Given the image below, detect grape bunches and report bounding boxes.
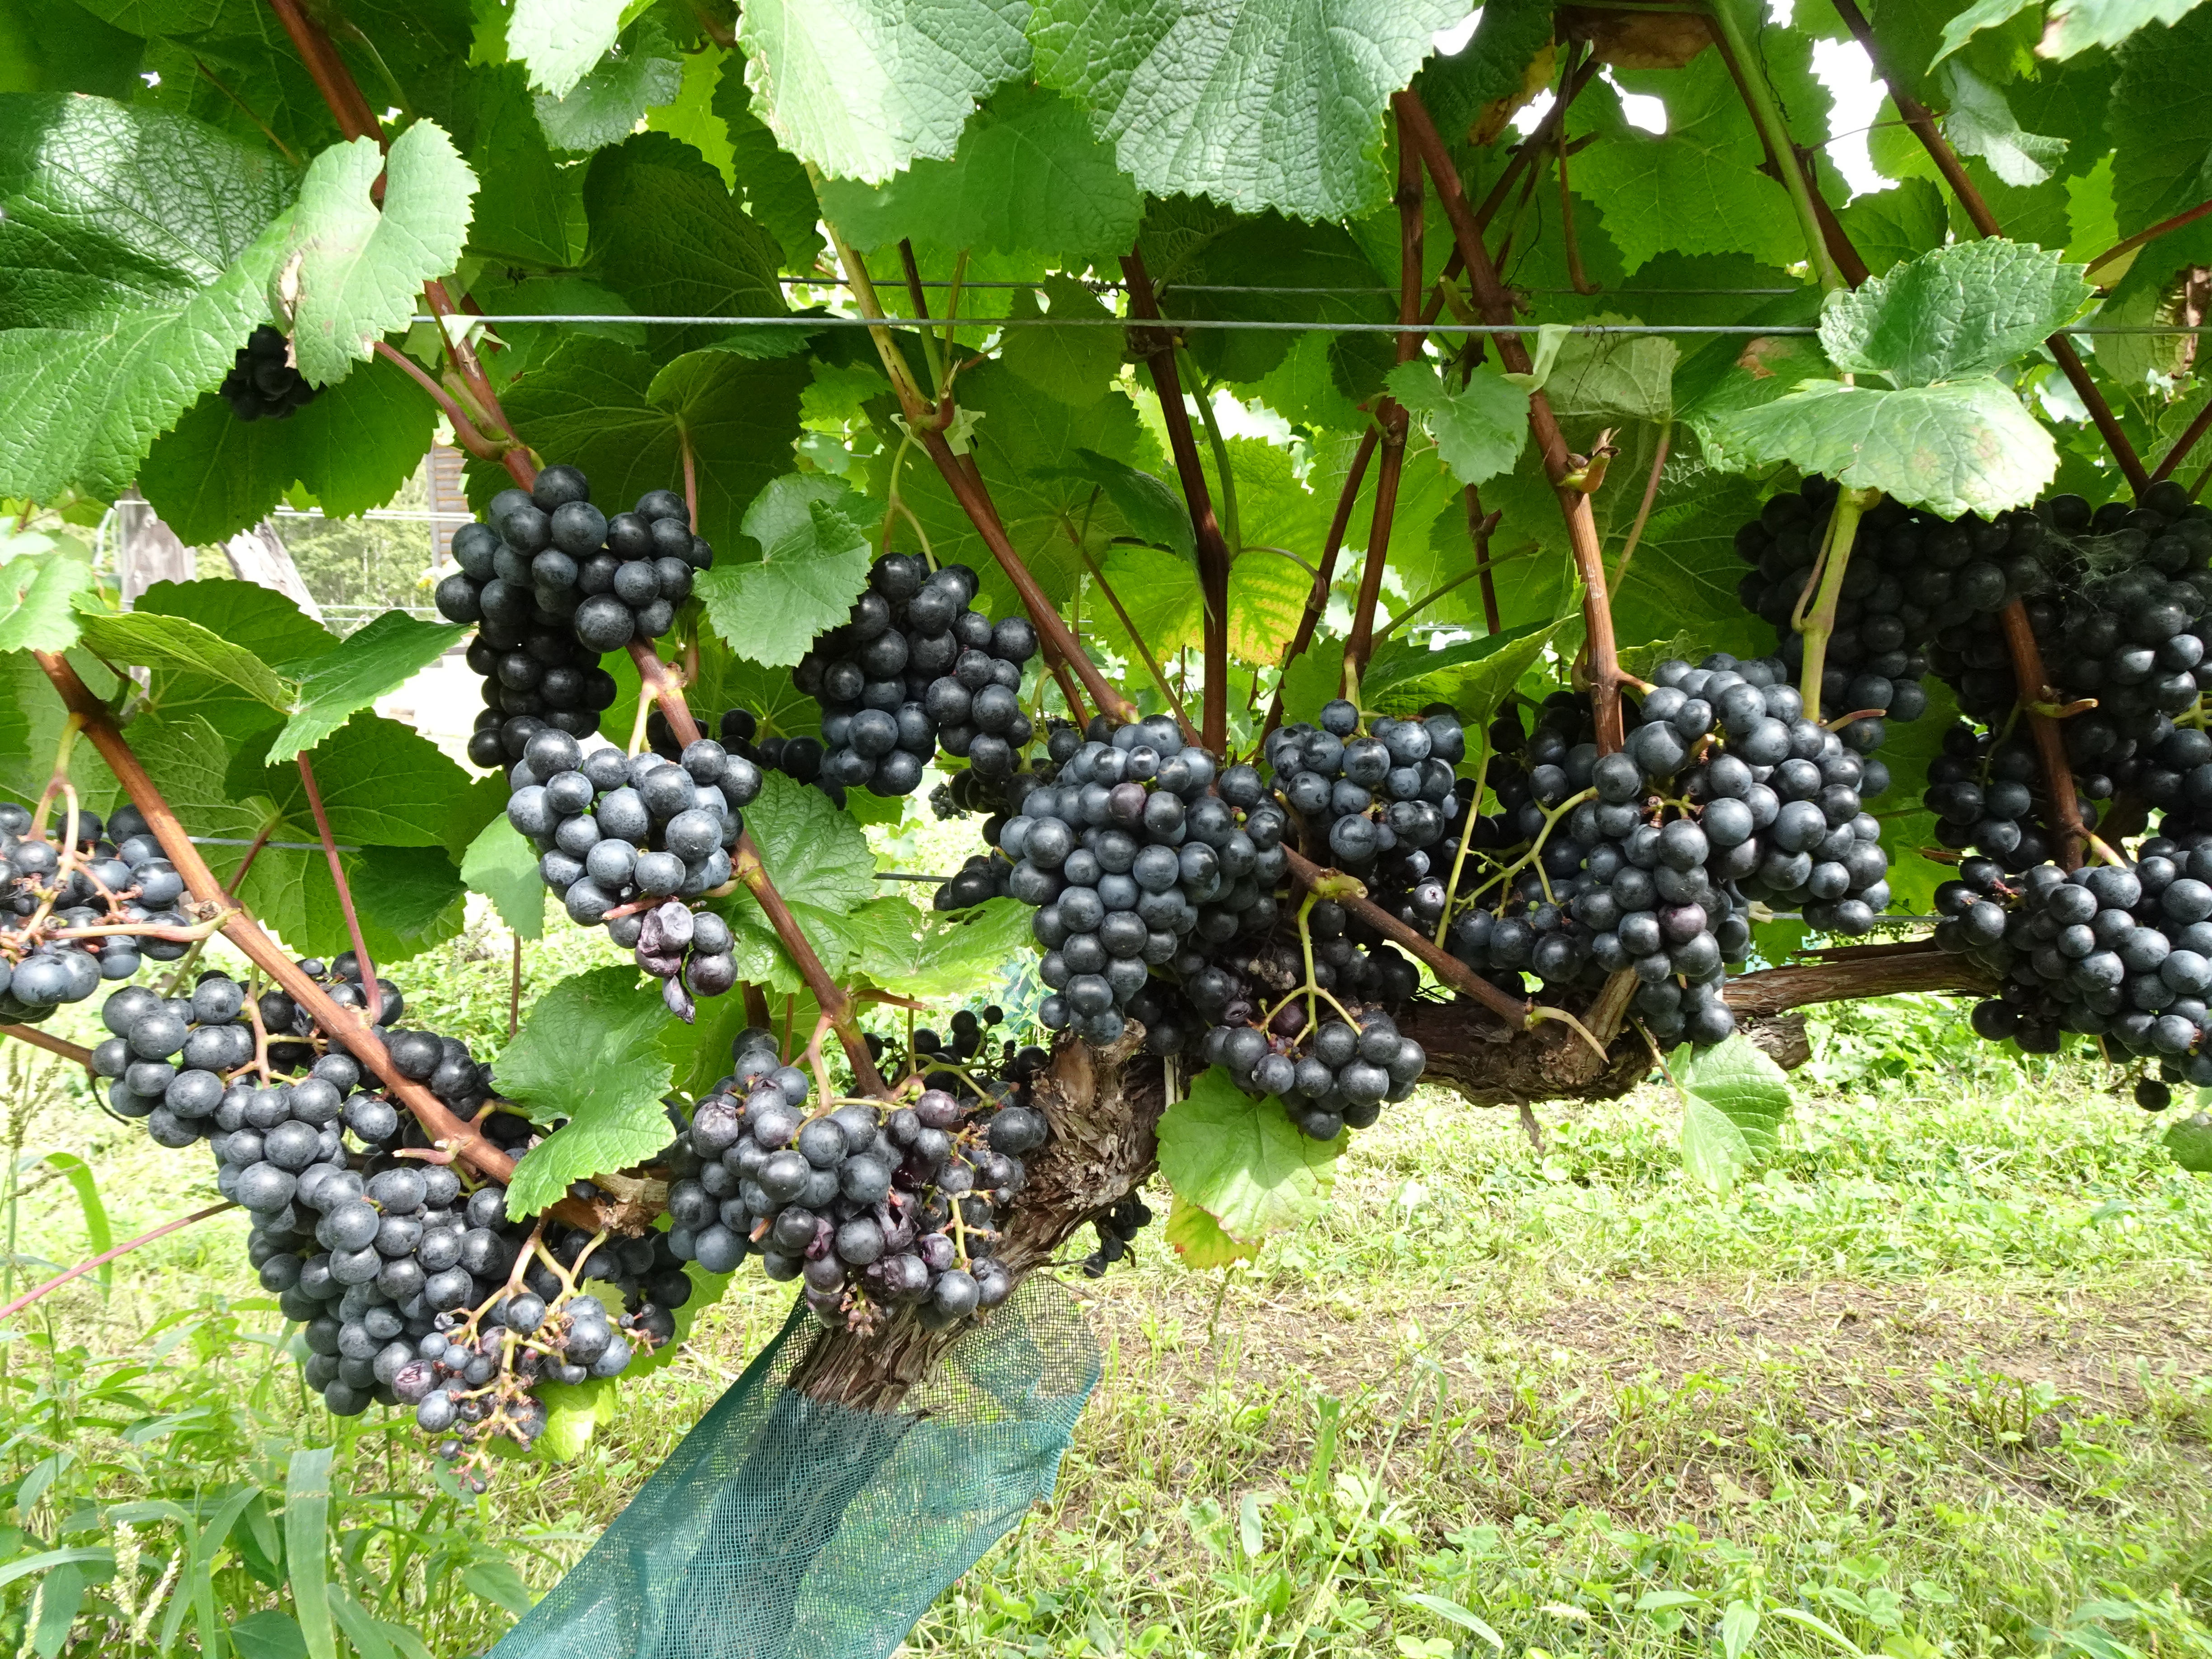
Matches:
[363,1029,533,1180]
[2135,713,2211,851]
[1934,856,2048,988]
[530,1180,691,1349]
[0,801,192,1026]
[1625,653,1891,937]
[576,490,713,652]
[1411,726,1612,1004]
[435,465,616,776]
[934,842,1015,922]
[1969,975,2081,1052]
[926,613,1038,773]
[854,1075,1048,1331]
[1924,726,2113,874]
[737,1106,905,1309]
[92,951,401,1236]
[1186,901,1419,1014]
[1121,974,1203,1056]
[1082,1192,1151,1278]
[313,1164,527,1382]
[793,552,979,798]
[1571,752,1755,1050]
[1202,1008,1425,1141]
[507,727,763,997]
[2026,837,2210,1087]
[391,1292,670,1494]
[2098,1031,2186,1111]
[1735,472,2045,750]
[220,324,329,423]
[2049,479,2212,787]
[948,759,1059,846]
[862,1005,1051,1100]
[1001,714,1288,1044]
[1445,689,1598,851]
[1264,699,1465,885]
[248,1191,401,1416]
[1926,600,2062,723]
[646,708,847,810]
[666,1025,807,1273]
